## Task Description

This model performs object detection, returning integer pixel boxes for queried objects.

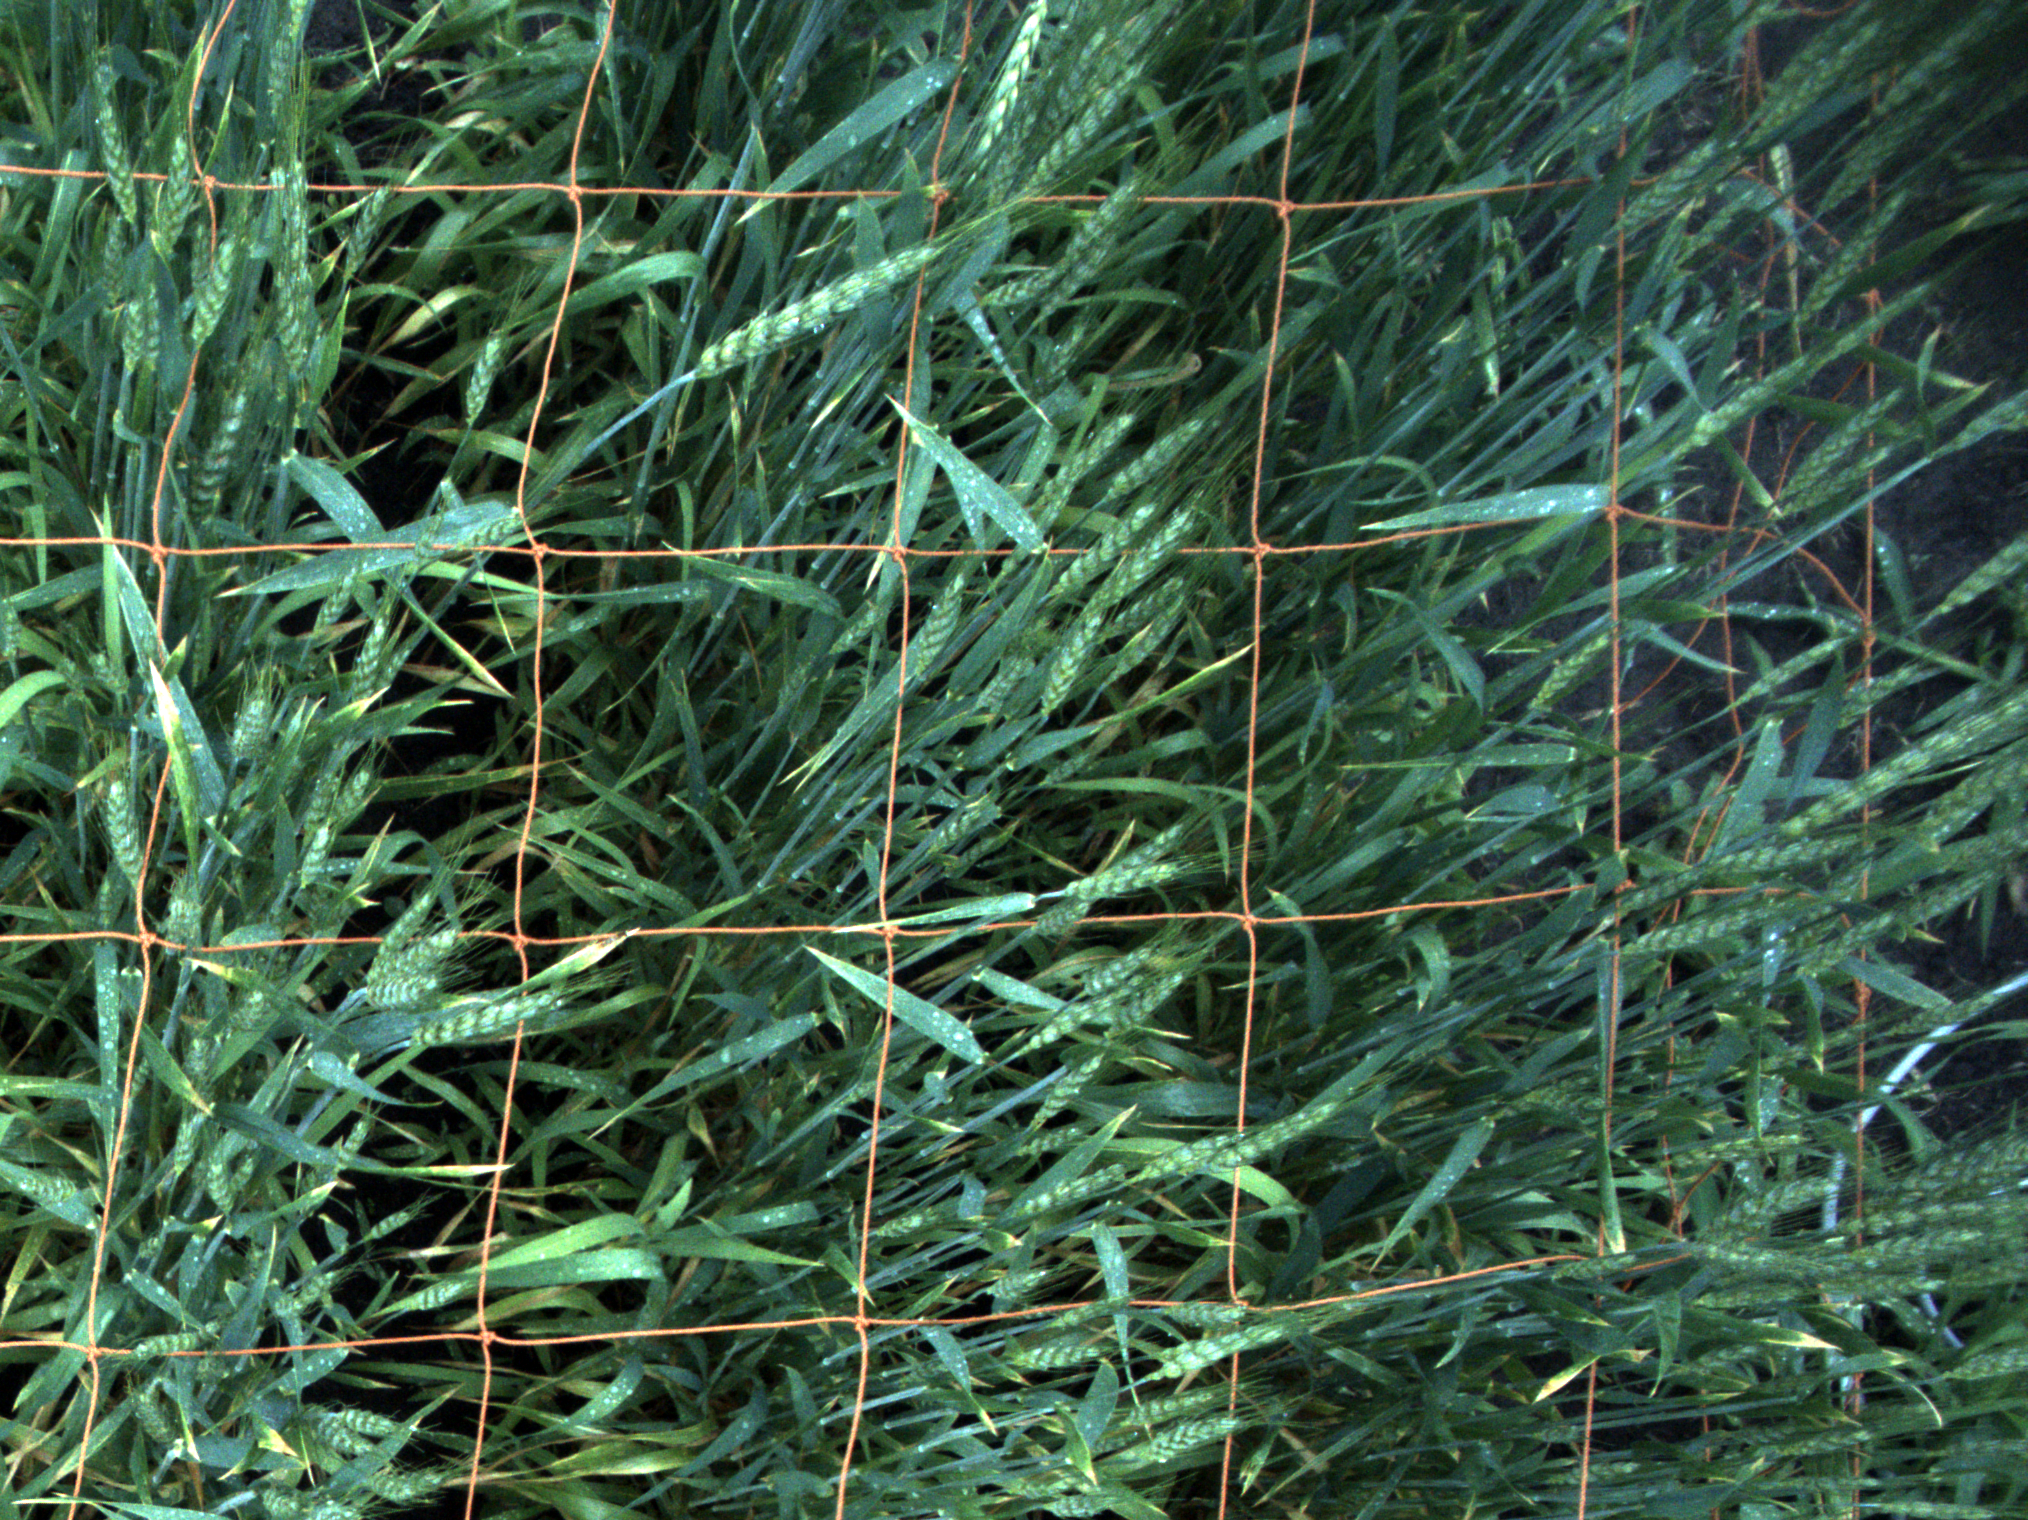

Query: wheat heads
[1025,58,1146,189]
[192,629,204,673]
[1016,1126,1089,1155]
[1854,1401,1929,1426]
[1617,136,1719,228]
[86,646,131,693]
[1524,1085,1606,1111]
[299,823,333,887]
[325,898,363,926]
[376,646,411,691]
[258,1486,301,1515]
[141,157,162,232]
[410,989,557,1045]
[1552,1251,1636,1282]
[1808,81,1959,217]
[974,267,1059,309]
[283,162,312,320]
[1040,233,1117,312]
[898,1357,946,1385]
[1164,1324,1287,1378]
[232,701,271,764]
[162,899,189,955]
[1062,863,1177,901]
[347,614,389,696]
[366,974,439,1006]
[1160,1339,1208,1360]
[1950,1437,2027,1455]
[1142,1416,1241,1467]
[309,880,332,928]
[1121,1391,1214,1424]
[1885,1495,1995,1520]
[1793,189,1907,323]
[333,1119,369,1170]
[1696,1240,1837,1275]
[188,232,238,347]
[1010,1346,1103,1372]
[93,94,138,221]
[226,987,267,1032]
[1620,897,1793,957]
[1690,1340,1765,1370]
[914,574,968,673]
[828,609,879,655]
[779,652,816,706]
[1032,898,1091,936]
[1039,411,1135,501]
[1889,993,1997,1035]
[1065,552,1134,637]
[319,564,360,629]
[1620,871,1698,915]
[270,165,290,217]
[1689,351,1807,448]
[1030,25,1108,151]
[1695,1278,1804,1307]
[1036,752,1089,787]
[1786,909,1843,950]
[369,1471,442,1505]
[1546,1459,1641,1488]
[1783,443,1891,512]
[188,391,248,522]
[1737,635,1854,702]
[1032,1051,1107,1124]
[464,333,503,423]
[1200,1100,1339,1168]
[1919,750,2023,837]
[1113,595,1187,679]
[1715,1425,1795,1448]
[1164,1302,1244,1330]
[989,19,1089,210]
[1767,1023,1870,1070]
[835,1050,921,1110]
[1676,1047,1714,1064]
[1088,1430,1140,1459]
[458,514,520,548]
[1707,833,1858,879]
[1530,1421,1580,1444]
[272,267,308,371]
[1049,1296,1115,1330]
[270,952,293,986]
[187,1035,217,1100]
[1048,1494,1124,1518]
[1585,82,1655,143]
[410,510,443,564]
[374,887,434,967]
[191,222,213,289]
[1883,1137,1997,1194]
[1754,23,1852,113]
[200,1320,221,1343]
[1030,973,1146,1047]
[1931,531,2027,614]
[13,1172,77,1204]
[1705,1176,1830,1242]
[120,293,144,363]
[134,1235,161,1263]
[1747,1372,1814,1400]
[1032,327,1087,399]
[300,1167,318,1197]
[1827,282,1931,360]
[229,1154,255,1190]
[206,1159,233,1213]
[341,185,390,282]
[1108,823,1183,872]
[369,1211,411,1242]
[1133,1130,1248,1183]
[1016,1161,1125,1218]
[971,655,1028,714]
[1820,1272,1942,1302]
[173,1119,197,1176]
[161,137,196,242]
[328,766,370,823]
[938,805,981,844]
[1661,987,1692,1013]
[405,1243,452,1260]
[129,1056,150,1096]
[244,1246,268,1278]
[1054,507,1156,591]
[1084,945,1153,996]
[292,1508,356,1520]
[404,1278,465,1311]
[1772,1427,1871,1457]
[1939,389,2027,456]
[948,835,995,867]
[1038,613,1100,714]
[1690,186,1755,247]
[963,19,1047,188]
[1823,1470,1844,1513]
[144,281,162,367]
[1802,912,1894,977]
[102,214,127,305]
[296,1267,339,1304]
[106,776,145,883]
[314,1414,375,1454]
[1010,1478,1061,1499]
[1668,1132,1801,1172]
[1945,1343,2026,1382]
[987,1267,1042,1301]
[1056,176,1147,270]
[696,245,939,379]
[1,608,20,660]
[302,771,338,832]
[198,1357,227,1384]
[276,361,290,398]
[136,1333,197,1360]
[338,1403,393,1438]
[1830,1199,1988,1237]
[1840,1228,1985,1271]
[1944,1137,2027,1200]
[1062,21,1160,119]
[132,1387,172,1447]
[1869,22,2004,121]
[999,458,1083,574]
[273,1295,305,1319]
[1526,631,1609,711]
[56,651,87,695]
[1746,22,1885,142]
[1750,1477,1880,1496]
[1119,1332,1165,1355]
[363,927,460,980]
[1778,384,1905,496]
[1102,971,1184,1039]
[1100,416,1200,502]
[1781,690,2026,832]
[178,899,207,953]
[266,18,305,106]
[873,1211,925,1243]
[1904,866,1998,924]
[1840,662,1922,725]
[99,879,115,924]
[1945,1251,2027,1287]
[1115,576,1188,629]
[1104,505,1196,605]
[1938,828,2019,868]
[1854,22,1916,80]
